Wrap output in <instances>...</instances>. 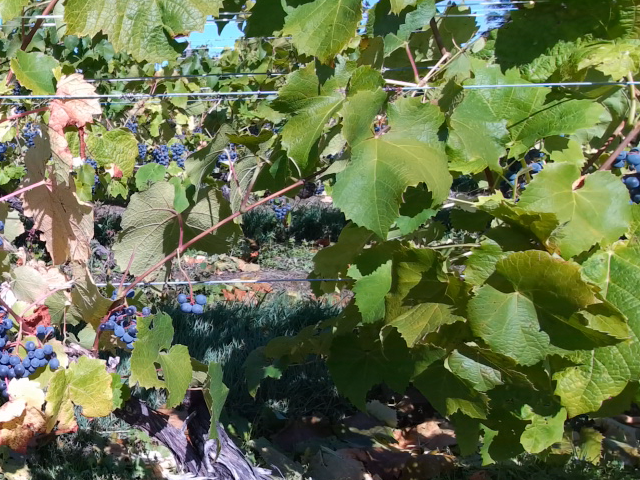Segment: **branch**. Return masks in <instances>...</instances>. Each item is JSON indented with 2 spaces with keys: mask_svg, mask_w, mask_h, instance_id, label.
Here are the masks:
<instances>
[{
  "mask_svg": "<svg viewBox=\"0 0 640 480\" xmlns=\"http://www.w3.org/2000/svg\"><path fill=\"white\" fill-rule=\"evenodd\" d=\"M326 170H328V166L323 167L322 169H320L319 171H317L316 173H313L307 177H305L304 179L298 180L297 182H293L291 184H289L286 188H284L281 191L278 192H274L272 194H269L257 201H255L254 203H252L251 205L236 210L233 213H231L226 219H224L223 221H221L220 223L214 225L213 227L205 230L204 232L195 235L192 239H190L188 242H186L185 244L175 248L174 250H172L171 252H169L167 255H165L163 258H161L156 264H154L153 266H151L149 269H147L146 271H144L142 273V275H139L138 278L132 283L131 286L125 288L124 290H122L120 292V294L118 295V297L116 298V300L109 306V310L113 311L118 305L119 303L122 301V299L125 297L126 294L130 293L133 289H135L138 286V283L140 281H143L146 279V277L148 275H150L151 273H153L155 270H157L159 267H161L164 263H166L170 258H172L173 256H175L176 254L186 250L187 248H189L191 245H193L194 243H196L198 240H202L204 237L214 233L215 231L223 228L225 225H227L228 223H230L234 218H236L238 215L247 213L252 211L253 209H255L256 207L260 206L263 203H266L267 201L280 197V196H284L285 194H287L289 191H291L292 189H294L297 186H301V183L303 182H307L308 180L318 176L319 174L325 172Z\"/></svg>",
  "mask_w": 640,
  "mask_h": 480,
  "instance_id": "obj_1",
  "label": "branch"
},
{
  "mask_svg": "<svg viewBox=\"0 0 640 480\" xmlns=\"http://www.w3.org/2000/svg\"><path fill=\"white\" fill-rule=\"evenodd\" d=\"M630 120H631V117L629 115H626L618 122V124L615 126L610 136L608 137V139L597 150H595L591 154V156L587 159V161L581 167V171L583 173H586L590 169L594 161L613 144V142L616 140L617 136L619 135L620 131Z\"/></svg>",
  "mask_w": 640,
  "mask_h": 480,
  "instance_id": "obj_2",
  "label": "branch"
},
{
  "mask_svg": "<svg viewBox=\"0 0 640 480\" xmlns=\"http://www.w3.org/2000/svg\"><path fill=\"white\" fill-rule=\"evenodd\" d=\"M640 134V121H637L634 126L630 129L625 139L622 141V144L616 148L604 161L603 168L608 170L612 164V162L617 158V156L623 151L626 150L627 147L636 139V137Z\"/></svg>",
  "mask_w": 640,
  "mask_h": 480,
  "instance_id": "obj_3",
  "label": "branch"
},
{
  "mask_svg": "<svg viewBox=\"0 0 640 480\" xmlns=\"http://www.w3.org/2000/svg\"><path fill=\"white\" fill-rule=\"evenodd\" d=\"M430 27H431L433 36H434L435 41H436V46H437L438 52L442 56L443 60L445 62H448L450 60V56H449L448 52L446 51V49L444 47L443 39H442V36L440 34L436 18L432 17L430 19Z\"/></svg>",
  "mask_w": 640,
  "mask_h": 480,
  "instance_id": "obj_4",
  "label": "branch"
},
{
  "mask_svg": "<svg viewBox=\"0 0 640 480\" xmlns=\"http://www.w3.org/2000/svg\"><path fill=\"white\" fill-rule=\"evenodd\" d=\"M0 308L6 315L11 317L18 324V326L26 335H29L32 332V329L27 326L24 320L16 312L8 307L3 299H0Z\"/></svg>",
  "mask_w": 640,
  "mask_h": 480,
  "instance_id": "obj_5",
  "label": "branch"
},
{
  "mask_svg": "<svg viewBox=\"0 0 640 480\" xmlns=\"http://www.w3.org/2000/svg\"><path fill=\"white\" fill-rule=\"evenodd\" d=\"M44 22L43 19H37L35 21V25L33 26V28L28 32L27 36L24 38V40L22 41V46L21 49L25 50L27 48V45L30 44L31 42V38L33 37V35L38 31V29L41 26V23Z\"/></svg>",
  "mask_w": 640,
  "mask_h": 480,
  "instance_id": "obj_6",
  "label": "branch"
}]
</instances>
